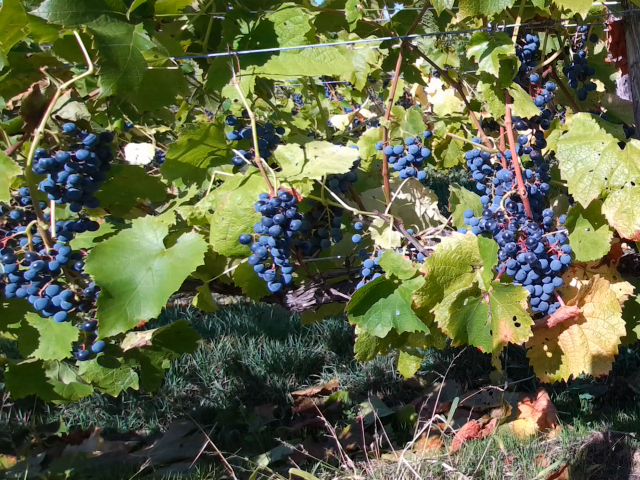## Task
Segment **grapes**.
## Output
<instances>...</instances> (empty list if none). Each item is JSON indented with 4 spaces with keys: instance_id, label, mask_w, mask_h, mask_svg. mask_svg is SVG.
Here are the masks:
<instances>
[{
    "instance_id": "18",
    "label": "grapes",
    "mask_w": 640,
    "mask_h": 480,
    "mask_svg": "<svg viewBox=\"0 0 640 480\" xmlns=\"http://www.w3.org/2000/svg\"><path fill=\"white\" fill-rule=\"evenodd\" d=\"M329 230L326 227H320L316 230V234L322 238L319 241V245L322 249H327L331 246V241L328 239L329 238Z\"/></svg>"
},
{
    "instance_id": "11",
    "label": "grapes",
    "mask_w": 640,
    "mask_h": 480,
    "mask_svg": "<svg viewBox=\"0 0 640 480\" xmlns=\"http://www.w3.org/2000/svg\"><path fill=\"white\" fill-rule=\"evenodd\" d=\"M7 213L8 209L5 206L0 205V217L6 215ZM8 217L14 224L17 225H15L11 231H7L5 233L6 237H11L13 235H17L18 232H23L29 222L36 221L35 213H32L31 211H25L24 209H12L8 213Z\"/></svg>"
},
{
    "instance_id": "1",
    "label": "grapes",
    "mask_w": 640,
    "mask_h": 480,
    "mask_svg": "<svg viewBox=\"0 0 640 480\" xmlns=\"http://www.w3.org/2000/svg\"><path fill=\"white\" fill-rule=\"evenodd\" d=\"M535 145L523 147L529 141V136L525 133L517 135V144L515 145L516 154H530V159L537 165L536 169H525L522 172V179L530 181L533 174L537 177L539 184L527 185V193L529 195L531 207V221L526 225L524 234L527 239L524 247L527 249L523 252V247L514 241L516 233L527 223L529 216L523 209L521 201L515 202L512 198L505 199V207L512 214L513 219L505 226V216L502 211L497 210L500 207V200L504 195V191H509L516 182L513 172L511 155L509 150L503 152L506 158L507 167L503 169L500 164L495 166L491 164V153L489 151L470 149L465 152L466 165L472 171V180L475 182V188L483 191L485 194L480 196L482 203L481 219L474 216L472 209L463 211L464 223L470 225V231L473 235H479L481 232L490 231L492 238L500 246L498 259L500 263L494 266V270L498 273H507L514 277L512 283L518 286L527 287L529 293L528 304L534 312H544L546 315H552L554 311L560 308L558 302L551 303V293L555 287H561L564 279L561 277V270H567L572 264V247L565 244L570 236V232L564 226H560L555 235L548 233L545 237L544 232L549 230L553 225V216L555 210L552 207L543 208L541 201L546 193L550 191V181L552 175L550 165L544 162L542 149L547 147V141L544 139V132L536 130L534 132ZM494 197L492 204L489 206L490 195L492 190L484 184L486 176H493ZM548 244H557L555 248L563 252L560 256L557 253L547 255L544 242Z\"/></svg>"
},
{
    "instance_id": "14",
    "label": "grapes",
    "mask_w": 640,
    "mask_h": 480,
    "mask_svg": "<svg viewBox=\"0 0 640 480\" xmlns=\"http://www.w3.org/2000/svg\"><path fill=\"white\" fill-rule=\"evenodd\" d=\"M105 347H106V342L104 340L98 339L90 345V350L87 348H84L83 346L76 347L73 351V355L80 362H84L91 356V352L93 354H98Z\"/></svg>"
},
{
    "instance_id": "19",
    "label": "grapes",
    "mask_w": 640,
    "mask_h": 480,
    "mask_svg": "<svg viewBox=\"0 0 640 480\" xmlns=\"http://www.w3.org/2000/svg\"><path fill=\"white\" fill-rule=\"evenodd\" d=\"M80 330L82 332H85V331L92 332L96 337H99L101 335V331L99 330L98 323L93 320L85 321L80 326Z\"/></svg>"
},
{
    "instance_id": "7",
    "label": "grapes",
    "mask_w": 640,
    "mask_h": 480,
    "mask_svg": "<svg viewBox=\"0 0 640 480\" xmlns=\"http://www.w3.org/2000/svg\"><path fill=\"white\" fill-rule=\"evenodd\" d=\"M525 44L522 48H517L515 53L518 59L521 61L519 64V70L527 79L532 83H536L541 79V75L538 72H534V69L538 66V63L533 59L534 53L538 50L540 44V38L533 33H527L525 35Z\"/></svg>"
},
{
    "instance_id": "12",
    "label": "grapes",
    "mask_w": 640,
    "mask_h": 480,
    "mask_svg": "<svg viewBox=\"0 0 640 480\" xmlns=\"http://www.w3.org/2000/svg\"><path fill=\"white\" fill-rule=\"evenodd\" d=\"M361 163V157H357L353 161V165L351 166V170L349 173L343 175H329L327 177L328 186L331 191L334 193L344 192L350 183H357L359 181V176L356 168Z\"/></svg>"
},
{
    "instance_id": "8",
    "label": "grapes",
    "mask_w": 640,
    "mask_h": 480,
    "mask_svg": "<svg viewBox=\"0 0 640 480\" xmlns=\"http://www.w3.org/2000/svg\"><path fill=\"white\" fill-rule=\"evenodd\" d=\"M275 127L272 123H266L263 127L257 128V136L258 138V146L260 147V155L263 158H270L272 156V152L276 149V144L281 142V137L279 135H284L286 133V129L284 127H278L276 129V133L278 135H274Z\"/></svg>"
},
{
    "instance_id": "6",
    "label": "grapes",
    "mask_w": 640,
    "mask_h": 480,
    "mask_svg": "<svg viewBox=\"0 0 640 480\" xmlns=\"http://www.w3.org/2000/svg\"><path fill=\"white\" fill-rule=\"evenodd\" d=\"M556 88L557 84L554 80H546L544 82V89L534 98L536 108L539 111H542L540 116L533 114L530 119H521L519 116H512V123H514V127L518 131H528L530 128L536 129L538 126H540L544 131H548L550 129V122L548 119L551 117V110L549 108H544V105L553 99V95L551 93Z\"/></svg>"
},
{
    "instance_id": "13",
    "label": "grapes",
    "mask_w": 640,
    "mask_h": 480,
    "mask_svg": "<svg viewBox=\"0 0 640 480\" xmlns=\"http://www.w3.org/2000/svg\"><path fill=\"white\" fill-rule=\"evenodd\" d=\"M100 294V287L94 282H91L88 287H85L81 292V296L84 298V301L77 305V310L79 312H87L93 309L95 307L94 302Z\"/></svg>"
},
{
    "instance_id": "10",
    "label": "grapes",
    "mask_w": 640,
    "mask_h": 480,
    "mask_svg": "<svg viewBox=\"0 0 640 480\" xmlns=\"http://www.w3.org/2000/svg\"><path fill=\"white\" fill-rule=\"evenodd\" d=\"M585 55L586 51L584 49H580L578 53L573 56V66L565 67L563 69V75L570 79L569 86L572 89H576L578 87L577 73L581 70L585 76H592L595 73V68L593 66H588L587 59L584 57Z\"/></svg>"
},
{
    "instance_id": "9",
    "label": "grapes",
    "mask_w": 640,
    "mask_h": 480,
    "mask_svg": "<svg viewBox=\"0 0 640 480\" xmlns=\"http://www.w3.org/2000/svg\"><path fill=\"white\" fill-rule=\"evenodd\" d=\"M357 254L360 258H365L368 254V250L366 248L359 249ZM383 255L381 250H377L374 253V259L367 257L362 261V268L359 271V275L362 278L358 284L354 286L356 290H360L361 288L367 285V281L365 279L369 278L371 281H376L382 277L380 272L373 273L379 268L380 257Z\"/></svg>"
},
{
    "instance_id": "15",
    "label": "grapes",
    "mask_w": 640,
    "mask_h": 480,
    "mask_svg": "<svg viewBox=\"0 0 640 480\" xmlns=\"http://www.w3.org/2000/svg\"><path fill=\"white\" fill-rule=\"evenodd\" d=\"M343 222V218L341 216H337L333 218L330 222L331 230L330 234L332 235V241L334 243H339L343 239L341 224Z\"/></svg>"
},
{
    "instance_id": "5",
    "label": "grapes",
    "mask_w": 640,
    "mask_h": 480,
    "mask_svg": "<svg viewBox=\"0 0 640 480\" xmlns=\"http://www.w3.org/2000/svg\"><path fill=\"white\" fill-rule=\"evenodd\" d=\"M404 144L407 146L405 154V147L403 145H391L388 144L385 148V154L387 155V162L392 164V168L398 171V175L401 179H407L408 177H415L419 181H423L427 177L425 170L417 171L410 163H422L425 158L431 155V151L426 146H419V142L414 137H406Z\"/></svg>"
},
{
    "instance_id": "16",
    "label": "grapes",
    "mask_w": 640,
    "mask_h": 480,
    "mask_svg": "<svg viewBox=\"0 0 640 480\" xmlns=\"http://www.w3.org/2000/svg\"><path fill=\"white\" fill-rule=\"evenodd\" d=\"M590 29H591V26H590L589 24H584V25H582V26L579 28V31L582 33V34L580 35V38H581L583 41H586L587 39H589L592 43H597V42L599 41V36H598L595 32H592L589 36H587V35L585 34V32L589 31ZM583 41H579V42L577 43V46H578L579 48H583V47L585 46V43H584Z\"/></svg>"
},
{
    "instance_id": "4",
    "label": "grapes",
    "mask_w": 640,
    "mask_h": 480,
    "mask_svg": "<svg viewBox=\"0 0 640 480\" xmlns=\"http://www.w3.org/2000/svg\"><path fill=\"white\" fill-rule=\"evenodd\" d=\"M297 198L288 189H278L276 197L269 192H261L254 210L261 213V221L253 224L258 241L249 245L251 256L247 264L259 279L267 282L270 293L290 286L293 279L294 264L289 260L291 236L296 231H310L313 224L303 219L296 205ZM272 263H273V264H274V265H276V266H279V267H278V271H279V272H280V274H279V280H278V279H276V278H277V269H276V268H275V267H267V268H265V266H264V265H263V264H261V261H267V260H268V259H269V255H270V256H271V257H272V258H273V259H272Z\"/></svg>"
},
{
    "instance_id": "20",
    "label": "grapes",
    "mask_w": 640,
    "mask_h": 480,
    "mask_svg": "<svg viewBox=\"0 0 640 480\" xmlns=\"http://www.w3.org/2000/svg\"><path fill=\"white\" fill-rule=\"evenodd\" d=\"M293 243L299 247L302 252H309L313 249L312 243L307 239L295 238Z\"/></svg>"
},
{
    "instance_id": "3",
    "label": "grapes",
    "mask_w": 640,
    "mask_h": 480,
    "mask_svg": "<svg viewBox=\"0 0 640 480\" xmlns=\"http://www.w3.org/2000/svg\"><path fill=\"white\" fill-rule=\"evenodd\" d=\"M62 130L82 140L83 146L49 157L46 149L38 147L32 156L33 172L38 176L47 172L46 179L38 183V190L59 205L69 203L73 213H80L84 206L90 210L98 208L101 200L94 194L100 189L97 181L106 178L104 171L112 168L113 161L112 148L105 143H112L115 133L103 132L97 136L80 131L74 122H65Z\"/></svg>"
},
{
    "instance_id": "2",
    "label": "grapes",
    "mask_w": 640,
    "mask_h": 480,
    "mask_svg": "<svg viewBox=\"0 0 640 480\" xmlns=\"http://www.w3.org/2000/svg\"><path fill=\"white\" fill-rule=\"evenodd\" d=\"M100 224L96 220L89 218H80L78 221H62L55 222V233L60 242H54L49 255L53 260L39 259L36 254L44 255L46 249L43 244V236L38 233V228L33 226L30 229L32 244L34 251H28L24 254V264L27 269L18 271L17 256L13 254L10 248H4L0 243V263L3 265V272L6 274L8 283L1 282L0 289L3 291L5 299L24 298L32 305L35 312H41L45 318L52 317L55 323H63L69 318V312L74 308L71 302L73 292L70 289H63L58 283L48 284L42 294L38 293L45 284L51 281L49 276L41 278L40 274L50 275L57 278L61 274V265L68 266L74 261L72 269L82 272L84 270V261L80 253H72V247L65 245L64 241H71L74 238L73 233L97 232Z\"/></svg>"
},
{
    "instance_id": "17",
    "label": "grapes",
    "mask_w": 640,
    "mask_h": 480,
    "mask_svg": "<svg viewBox=\"0 0 640 480\" xmlns=\"http://www.w3.org/2000/svg\"><path fill=\"white\" fill-rule=\"evenodd\" d=\"M16 199L19 201V203L23 206H28L31 204V196H30V190L28 186H22L18 189V195L16 196Z\"/></svg>"
}]
</instances>
